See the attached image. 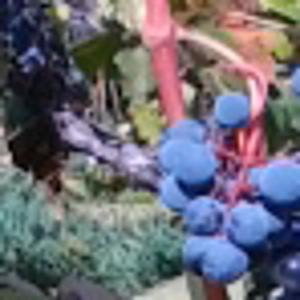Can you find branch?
Segmentation results:
<instances>
[{
  "label": "branch",
  "instance_id": "branch-1",
  "mask_svg": "<svg viewBox=\"0 0 300 300\" xmlns=\"http://www.w3.org/2000/svg\"><path fill=\"white\" fill-rule=\"evenodd\" d=\"M147 44L155 68L158 89L166 118L179 122L185 116V104L178 85V59L172 36L169 0H145Z\"/></svg>",
  "mask_w": 300,
  "mask_h": 300
},
{
  "label": "branch",
  "instance_id": "branch-2",
  "mask_svg": "<svg viewBox=\"0 0 300 300\" xmlns=\"http://www.w3.org/2000/svg\"><path fill=\"white\" fill-rule=\"evenodd\" d=\"M208 300H230V292L223 285L212 286L206 292Z\"/></svg>",
  "mask_w": 300,
  "mask_h": 300
}]
</instances>
